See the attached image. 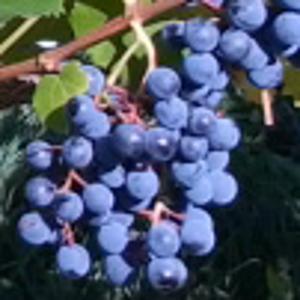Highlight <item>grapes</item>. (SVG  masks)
<instances>
[{
    "label": "grapes",
    "mask_w": 300,
    "mask_h": 300,
    "mask_svg": "<svg viewBox=\"0 0 300 300\" xmlns=\"http://www.w3.org/2000/svg\"><path fill=\"white\" fill-rule=\"evenodd\" d=\"M230 0L226 27L210 16L171 23L163 30L170 46L187 45L181 62L145 76L147 93L106 88L105 73L89 64V90L65 105L74 125L63 141L59 184L44 172L57 160L55 146L33 138L24 147L34 172L22 186L30 207L15 222L18 238L32 249L57 248V270L72 282L91 272L86 247L75 241L80 220L94 230V246L113 287L130 286L136 266L129 258L135 217L152 219L145 231L148 286L156 295H177L188 283L179 258H208L219 230L207 209L239 200L240 182L227 169L242 144V131L217 111L240 69L261 90L281 89L286 61L300 68V0Z\"/></svg>",
    "instance_id": "1"
}]
</instances>
